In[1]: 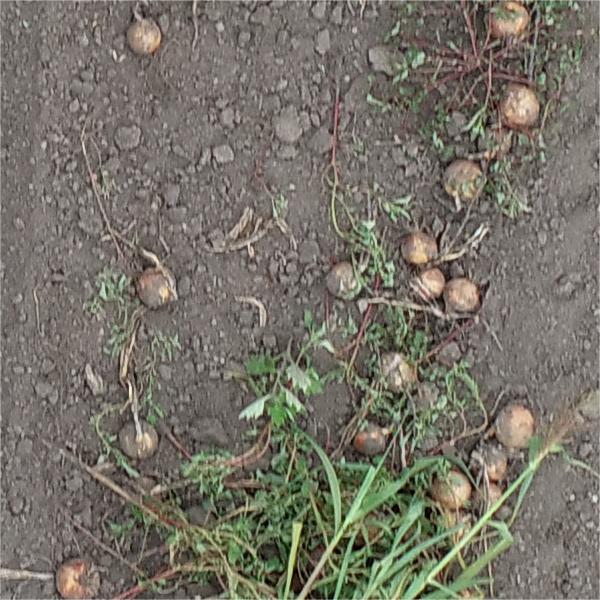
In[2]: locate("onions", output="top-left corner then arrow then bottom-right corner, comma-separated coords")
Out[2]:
402,231 -> 434,264
124,21 -> 161,56
436,340 -> 461,365
498,85 -> 539,126
488,1 -> 527,38
413,266 -> 444,298
353,424 -> 384,453
324,261 -> 359,297
493,404 -> 534,446
475,442 -> 511,479
480,484 -> 503,510
134,267 -> 173,307
442,160 -> 482,200
120,420 -> 157,455
437,511 -> 470,547
430,469 -> 470,510
374,351 -> 415,390
55,558 -> 101,600
443,277 -> 483,315
480,123 -> 513,157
